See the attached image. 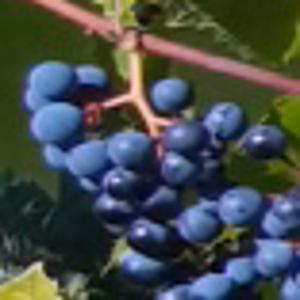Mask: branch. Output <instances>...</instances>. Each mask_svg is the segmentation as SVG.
<instances>
[{
	"mask_svg": "<svg viewBox=\"0 0 300 300\" xmlns=\"http://www.w3.org/2000/svg\"><path fill=\"white\" fill-rule=\"evenodd\" d=\"M31 4L37 10L114 40L127 51L138 48L149 57L207 69L211 73L221 72L231 77L252 80L300 97V79L284 72L256 63L235 60L226 55H216L189 43L170 40L157 31L145 30L130 24L112 23L65 1L31 0Z\"/></svg>",
	"mask_w": 300,
	"mask_h": 300,
	"instance_id": "1",
	"label": "branch"
}]
</instances>
